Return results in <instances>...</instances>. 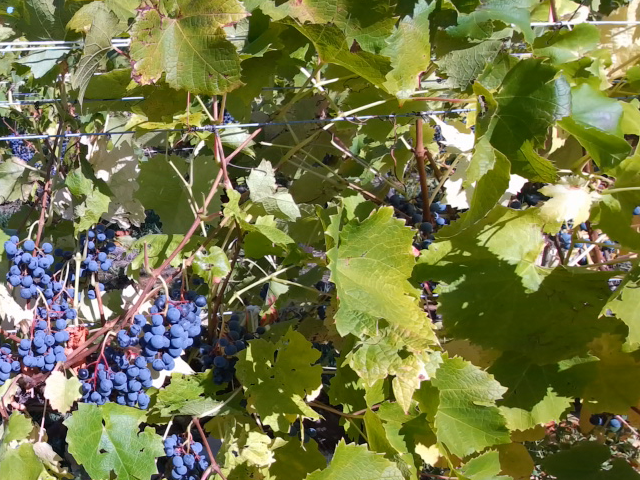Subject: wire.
<instances>
[{
    "mask_svg": "<svg viewBox=\"0 0 640 480\" xmlns=\"http://www.w3.org/2000/svg\"><path fill=\"white\" fill-rule=\"evenodd\" d=\"M135 130H114V131H101V132H77V133H64V134H50V135H30V134H22L17 136L12 135H3L0 136V142L10 140V141H20L24 139L28 140H52V139H67V138H79V137H87V138H95V137H104V136H116V135H135Z\"/></svg>",
    "mask_w": 640,
    "mask_h": 480,
    "instance_id": "a73af890",
    "label": "wire"
},
{
    "mask_svg": "<svg viewBox=\"0 0 640 480\" xmlns=\"http://www.w3.org/2000/svg\"><path fill=\"white\" fill-rule=\"evenodd\" d=\"M478 106L459 109H426L394 114H360L348 117L315 118L310 120H284L282 122H237L232 124L186 125L171 129H151V134H173L188 130L234 129L239 127H284L286 125H312L317 123L350 122L362 119H397L428 114H461L478 111Z\"/></svg>",
    "mask_w": 640,
    "mask_h": 480,
    "instance_id": "d2f4af69",
    "label": "wire"
},
{
    "mask_svg": "<svg viewBox=\"0 0 640 480\" xmlns=\"http://www.w3.org/2000/svg\"><path fill=\"white\" fill-rule=\"evenodd\" d=\"M531 26H579V25H604V26H620V27H638L640 21L622 22V21H606V20H576V21H531Z\"/></svg>",
    "mask_w": 640,
    "mask_h": 480,
    "instance_id": "4f2155b8",
    "label": "wire"
}]
</instances>
